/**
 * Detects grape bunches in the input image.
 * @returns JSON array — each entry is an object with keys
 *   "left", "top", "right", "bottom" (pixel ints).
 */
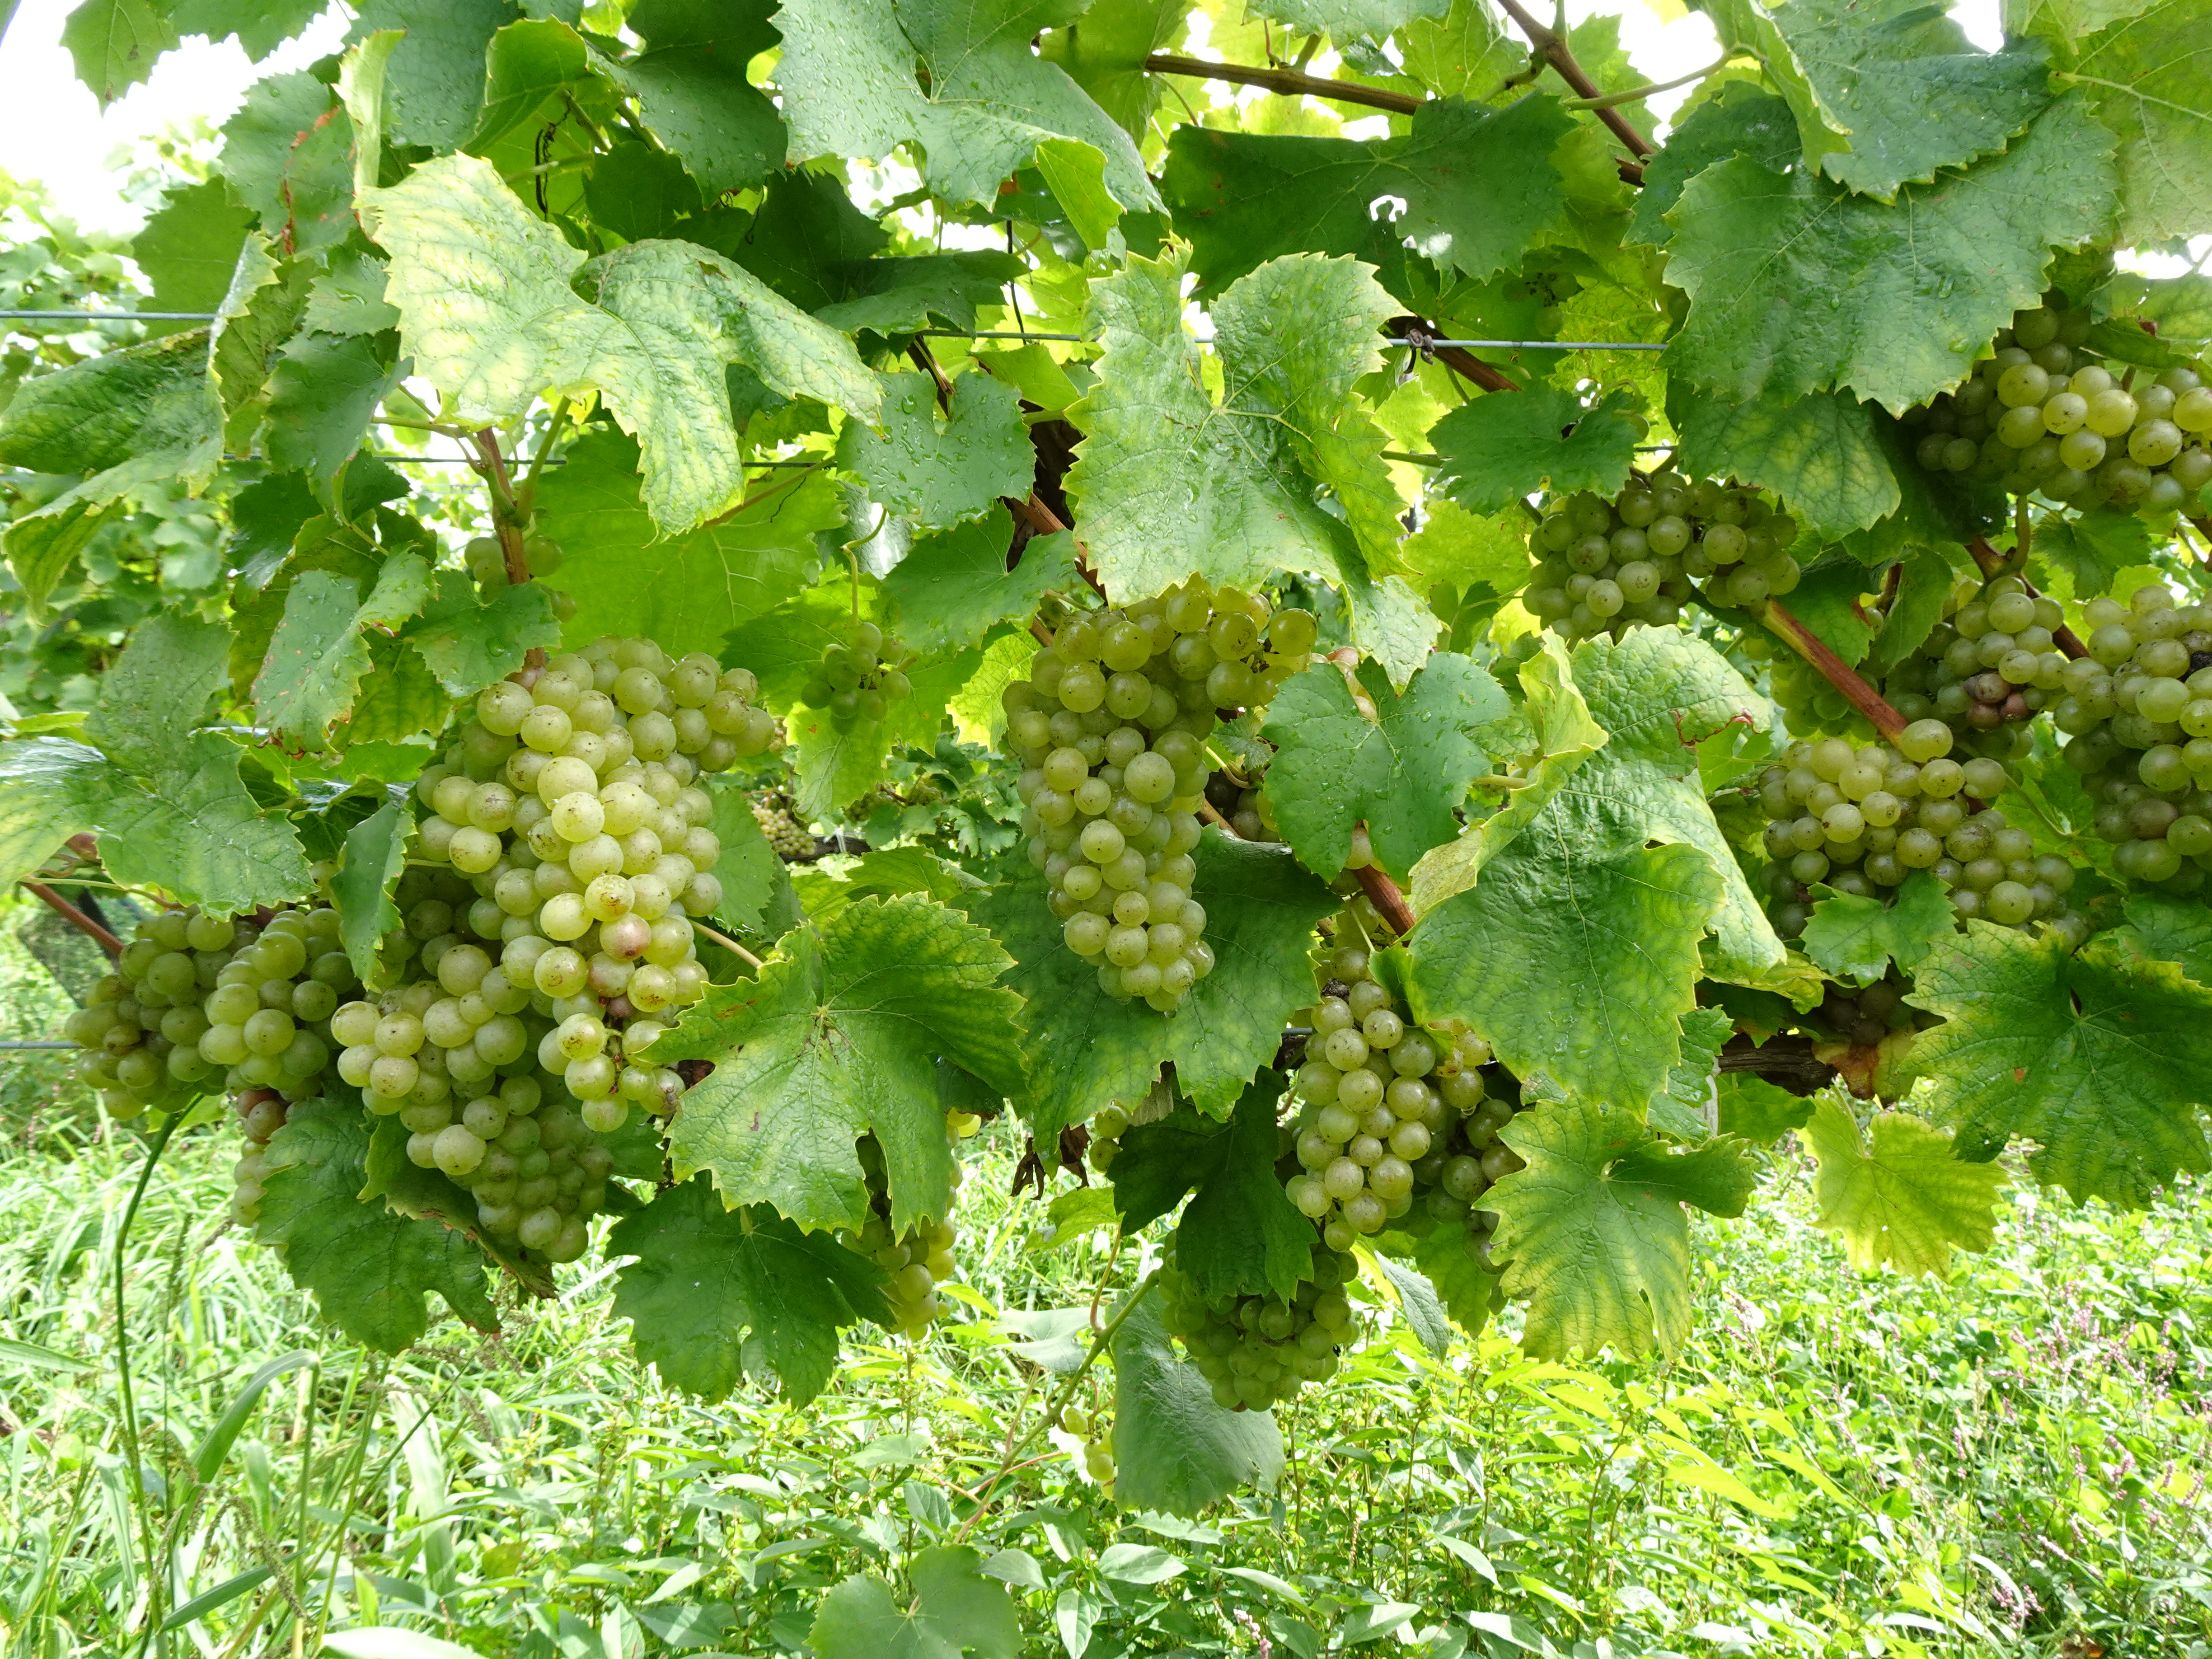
[
  {"left": 368, "top": 864, "right": 504, "bottom": 983},
  {"left": 1308, "top": 641, "right": 1380, "bottom": 725},
  {"left": 800, "top": 621, "right": 911, "bottom": 735},
  {"left": 1757, "top": 719, "right": 2007, "bottom": 1048},
  {"left": 1939, "top": 569, "right": 2063, "bottom": 784},
  {"left": 199, "top": 909, "right": 359, "bottom": 1101},
  {"left": 2054, "top": 586, "right": 2212, "bottom": 906},
  {"left": 1062, "top": 1406, "right": 1117, "bottom": 1482},
  {"left": 1309, "top": 894, "right": 1386, "bottom": 988},
  {"left": 1285, "top": 983, "right": 1490, "bottom": 1251},
  {"left": 1679, "top": 478, "right": 1800, "bottom": 609},
  {"left": 1089, "top": 1107, "right": 1126, "bottom": 1171},
  {"left": 1899, "top": 300, "right": 2137, "bottom": 512},
  {"left": 1738, "top": 607, "right": 1958, "bottom": 740},
  {"left": 1955, "top": 829, "right": 2075, "bottom": 932},
  {"left": 465, "top": 513, "right": 577, "bottom": 622},
  {"left": 1524, "top": 472, "right": 1692, "bottom": 655},
  {"left": 1406, "top": 1086, "right": 1527, "bottom": 1272},
  {"left": 1158, "top": 1230, "right": 1359, "bottom": 1412},
  {"left": 2095, "top": 367, "right": 2212, "bottom": 520},
  {"left": 232, "top": 1083, "right": 294, "bottom": 1224},
  {"left": 65, "top": 901, "right": 284, "bottom": 1120},
  {"left": 333, "top": 944, "right": 616, "bottom": 1258},
  {"left": 1003, "top": 573, "right": 1314, "bottom": 1011},
  {"left": 1202, "top": 749, "right": 1404, "bottom": 892},
  {"left": 840, "top": 1104, "right": 981, "bottom": 1341},
  {"left": 417, "top": 635, "right": 776, "bottom": 1134}
]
